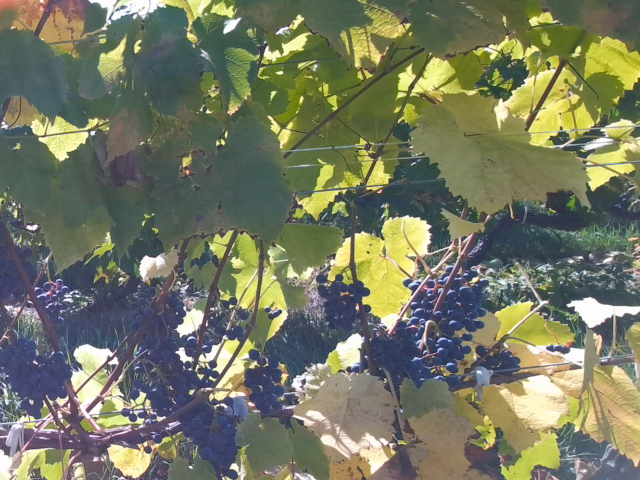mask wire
<instances>
[{
    "instance_id": "obj_1",
    "label": "wire",
    "mask_w": 640,
    "mask_h": 480,
    "mask_svg": "<svg viewBox=\"0 0 640 480\" xmlns=\"http://www.w3.org/2000/svg\"><path fill=\"white\" fill-rule=\"evenodd\" d=\"M444 182H445L444 178L404 179V180H397L393 182H376L372 184H349L344 186L301 189V190L293 191L292 195L298 196L303 194L346 191L351 189H374L379 187H395V186L406 185V184L444 183Z\"/></svg>"
},
{
    "instance_id": "obj_2",
    "label": "wire",
    "mask_w": 640,
    "mask_h": 480,
    "mask_svg": "<svg viewBox=\"0 0 640 480\" xmlns=\"http://www.w3.org/2000/svg\"><path fill=\"white\" fill-rule=\"evenodd\" d=\"M408 141H385V142H366L362 144H352V145H324V146H311V147H300L295 149H282V154H298L303 152H313V151H327V150H354V149H364L369 147H388V146H408Z\"/></svg>"
},
{
    "instance_id": "obj_3",
    "label": "wire",
    "mask_w": 640,
    "mask_h": 480,
    "mask_svg": "<svg viewBox=\"0 0 640 480\" xmlns=\"http://www.w3.org/2000/svg\"><path fill=\"white\" fill-rule=\"evenodd\" d=\"M627 129H640V124H625V125H611V126H579L575 128H552L546 130H531L528 132L529 136L533 135H548L555 133H578L581 131H613V130H627Z\"/></svg>"
},
{
    "instance_id": "obj_4",
    "label": "wire",
    "mask_w": 640,
    "mask_h": 480,
    "mask_svg": "<svg viewBox=\"0 0 640 480\" xmlns=\"http://www.w3.org/2000/svg\"><path fill=\"white\" fill-rule=\"evenodd\" d=\"M584 360L581 361H566V362H560V363H551V364H542V365H525V366H520V367H511V368H503V369H498V370H492V373H501V372H506V371H513V370H537L540 368H546V367H553V366H562V365H569V364H583Z\"/></svg>"
},
{
    "instance_id": "obj_5",
    "label": "wire",
    "mask_w": 640,
    "mask_h": 480,
    "mask_svg": "<svg viewBox=\"0 0 640 480\" xmlns=\"http://www.w3.org/2000/svg\"><path fill=\"white\" fill-rule=\"evenodd\" d=\"M630 164H640V159H628L625 161H613L609 163H587V168H611L615 166H628Z\"/></svg>"
},
{
    "instance_id": "obj_6",
    "label": "wire",
    "mask_w": 640,
    "mask_h": 480,
    "mask_svg": "<svg viewBox=\"0 0 640 480\" xmlns=\"http://www.w3.org/2000/svg\"><path fill=\"white\" fill-rule=\"evenodd\" d=\"M426 155L425 154H415V155H405V156H395V157H390V158H378L377 162L378 163H393V162H403V161H407V160H418V159H425Z\"/></svg>"
},
{
    "instance_id": "obj_7",
    "label": "wire",
    "mask_w": 640,
    "mask_h": 480,
    "mask_svg": "<svg viewBox=\"0 0 640 480\" xmlns=\"http://www.w3.org/2000/svg\"><path fill=\"white\" fill-rule=\"evenodd\" d=\"M330 165H331L330 161H326V162H307V163H300V164L285 165L284 169L285 170H293V169H302V168H309V167H328Z\"/></svg>"
},
{
    "instance_id": "obj_8",
    "label": "wire",
    "mask_w": 640,
    "mask_h": 480,
    "mask_svg": "<svg viewBox=\"0 0 640 480\" xmlns=\"http://www.w3.org/2000/svg\"><path fill=\"white\" fill-rule=\"evenodd\" d=\"M121 413H122L121 409H114V410H109V411L100 412V413H91L90 417L91 418H102V417H107V416H111V415H117V414H121Z\"/></svg>"
}]
</instances>
